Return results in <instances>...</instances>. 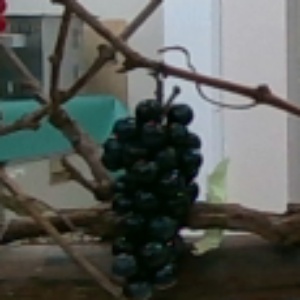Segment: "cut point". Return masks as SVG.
Wrapping results in <instances>:
<instances>
[{
	"label": "cut point",
	"instance_id": "cut-point-1",
	"mask_svg": "<svg viewBox=\"0 0 300 300\" xmlns=\"http://www.w3.org/2000/svg\"><path fill=\"white\" fill-rule=\"evenodd\" d=\"M153 74L156 77V100H158L161 105L163 106V102H164V76L167 75V73L159 70V69H155L153 71Z\"/></svg>",
	"mask_w": 300,
	"mask_h": 300
}]
</instances>
